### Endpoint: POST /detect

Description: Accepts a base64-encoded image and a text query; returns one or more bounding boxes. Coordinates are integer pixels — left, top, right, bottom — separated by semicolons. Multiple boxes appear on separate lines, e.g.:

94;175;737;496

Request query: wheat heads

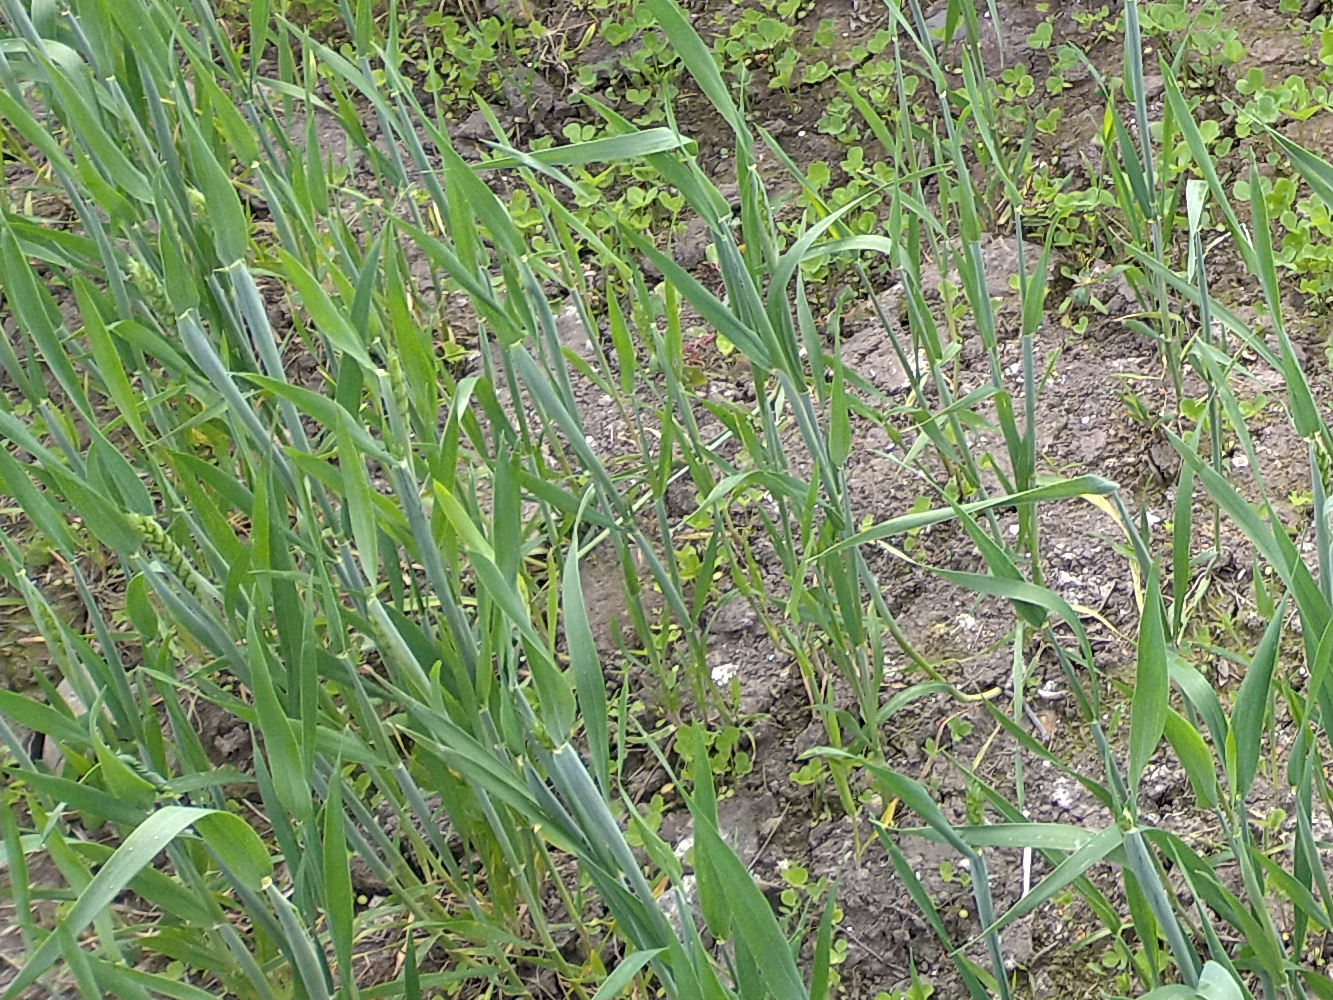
757;177;771;239
131;512;195;593
387;349;409;441
28;582;69;662
170;188;230;320
130;260;180;351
